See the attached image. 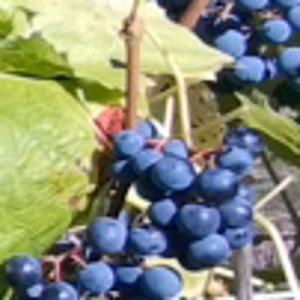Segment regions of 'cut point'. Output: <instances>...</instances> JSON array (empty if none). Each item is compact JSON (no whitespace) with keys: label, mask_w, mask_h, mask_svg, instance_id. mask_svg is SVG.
Masks as SVG:
<instances>
[{"label":"cut point","mask_w":300,"mask_h":300,"mask_svg":"<svg viewBox=\"0 0 300 300\" xmlns=\"http://www.w3.org/2000/svg\"><path fill=\"white\" fill-rule=\"evenodd\" d=\"M143 32L146 33L148 36H150L153 40H155L156 44L164 52L172 68L177 83L176 89H177V95L179 99L180 110H181L179 112V116L181 117L180 123H181L182 133H183V137L187 141H190L192 139V134H191V128L189 123L190 115L188 110V97H187L186 85L184 83L183 76L178 66V63L170 48L154 30H152L150 27L144 24Z\"/></svg>","instance_id":"1"}]
</instances>
